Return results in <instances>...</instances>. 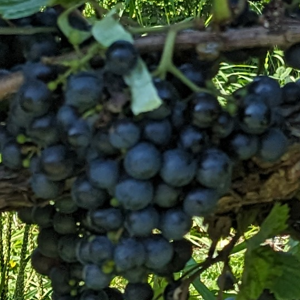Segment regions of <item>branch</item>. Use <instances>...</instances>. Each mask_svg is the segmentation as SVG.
<instances>
[{
    "mask_svg": "<svg viewBox=\"0 0 300 300\" xmlns=\"http://www.w3.org/2000/svg\"><path fill=\"white\" fill-rule=\"evenodd\" d=\"M247 8V0H215L211 14L181 26L137 30L133 32L131 41L145 68L154 71L160 63L171 27L179 29L172 63L183 59H196L204 63L250 54L266 47L286 46L300 40V18L283 7L274 9L271 17L236 25L238 17Z\"/></svg>",
    "mask_w": 300,
    "mask_h": 300,
    "instance_id": "1",
    "label": "branch"
},
{
    "mask_svg": "<svg viewBox=\"0 0 300 300\" xmlns=\"http://www.w3.org/2000/svg\"><path fill=\"white\" fill-rule=\"evenodd\" d=\"M25 82L24 74L21 70H16L0 79V102L16 93Z\"/></svg>",
    "mask_w": 300,
    "mask_h": 300,
    "instance_id": "2",
    "label": "branch"
}]
</instances>
